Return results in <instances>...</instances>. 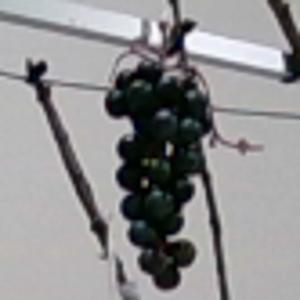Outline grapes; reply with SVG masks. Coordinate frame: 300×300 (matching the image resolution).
Wrapping results in <instances>:
<instances>
[{"instance_id":"grapes-1","label":"grapes","mask_w":300,"mask_h":300,"mask_svg":"<svg viewBox=\"0 0 300 300\" xmlns=\"http://www.w3.org/2000/svg\"><path fill=\"white\" fill-rule=\"evenodd\" d=\"M113 87L105 94L104 113L127 119L133 132L115 143L123 161L115 182L128 192L119 203L120 216L129 222L126 238L143 250L138 265L154 288L172 292L181 285V269L197 256L190 240L168 239L184 229L182 209L195 194L192 178L207 165L202 138L214 128L209 97L194 80L166 75L152 57L139 60L134 71L117 72Z\"/></svg>"}]
</instances>
